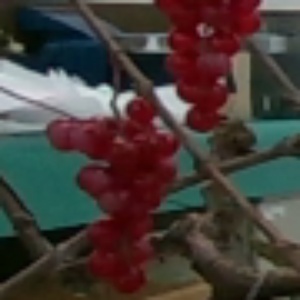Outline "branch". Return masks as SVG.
<instances>
[{"instance_id":"3","label":"branch","mask_w":300,"mask_h":300,"mask_svg":"<svg viewBox=\"0 0 300 300\" xmlns=\"http://www.w3.org/2000/svg\"><path fill=\"white\" fill-rule=\"evenodd\" d=\"M248 46L257 54L260 60L272 71L281 86L295 98H300V88L289 80L285 72L282 70L276 60L269 56L265 48L251 35H244L241 37Z\"/></svg>"},{"instance_id":"1","label":"branch","mask_w":300,"mask_h":300,"mask_svg":"<svg viewBox=\"0 0 300 300\" xmlns=\"http://www.w3.org/2000/svg\"><path fill=\"white\" fill-rule=\"evenodd\" d=\"M71 1L82 12L90 27L104 40L106 46L114 50L116 63H119L122 69L136 83L135 93L137 96H146L153 101L156 108L155 116L160 118L167 128L179 134L181 144L186 148L188 153L197 160L198 164L204 168L201 173L184 176L168 182L166 185L167 195L180 193L190 187L207 181L217 180L228 195L238 204L240 210L253 221L260 232L268 238L273 246H278L279 244L287 245L289 238L270 225L261 212L255 208L226 176L244 168L256 166L265 161L300 155V135L288 138L262 152L254 153L236 161L215 165L210 159L206 158L205 154L196 147L194 142L183 133L176 121L172 119L164 104H162L161 100L156 96L154 82L149 80V78L139 70L129 55L122 49L121 44L98 21L86 1Z\"/></svg>"},{"instance_id":"2","label":"branch","mask_w":300,"mask_h":300,"mask_svg":"<svg viewBox=\"0 0 300 300\" xmlns=\"http://www.w3.org/2000/svg\"><path fill=\"white\" fill-rule=\"evenodd\" d=\"M88 228L89 226L78 231L75 235L57 245L55 249L23 266L10 278L0 282V297L6 296L14 288L47 270L51 265L71 253L75 248L82 246L87 240Z\"/></svg>"}]
</instances>
